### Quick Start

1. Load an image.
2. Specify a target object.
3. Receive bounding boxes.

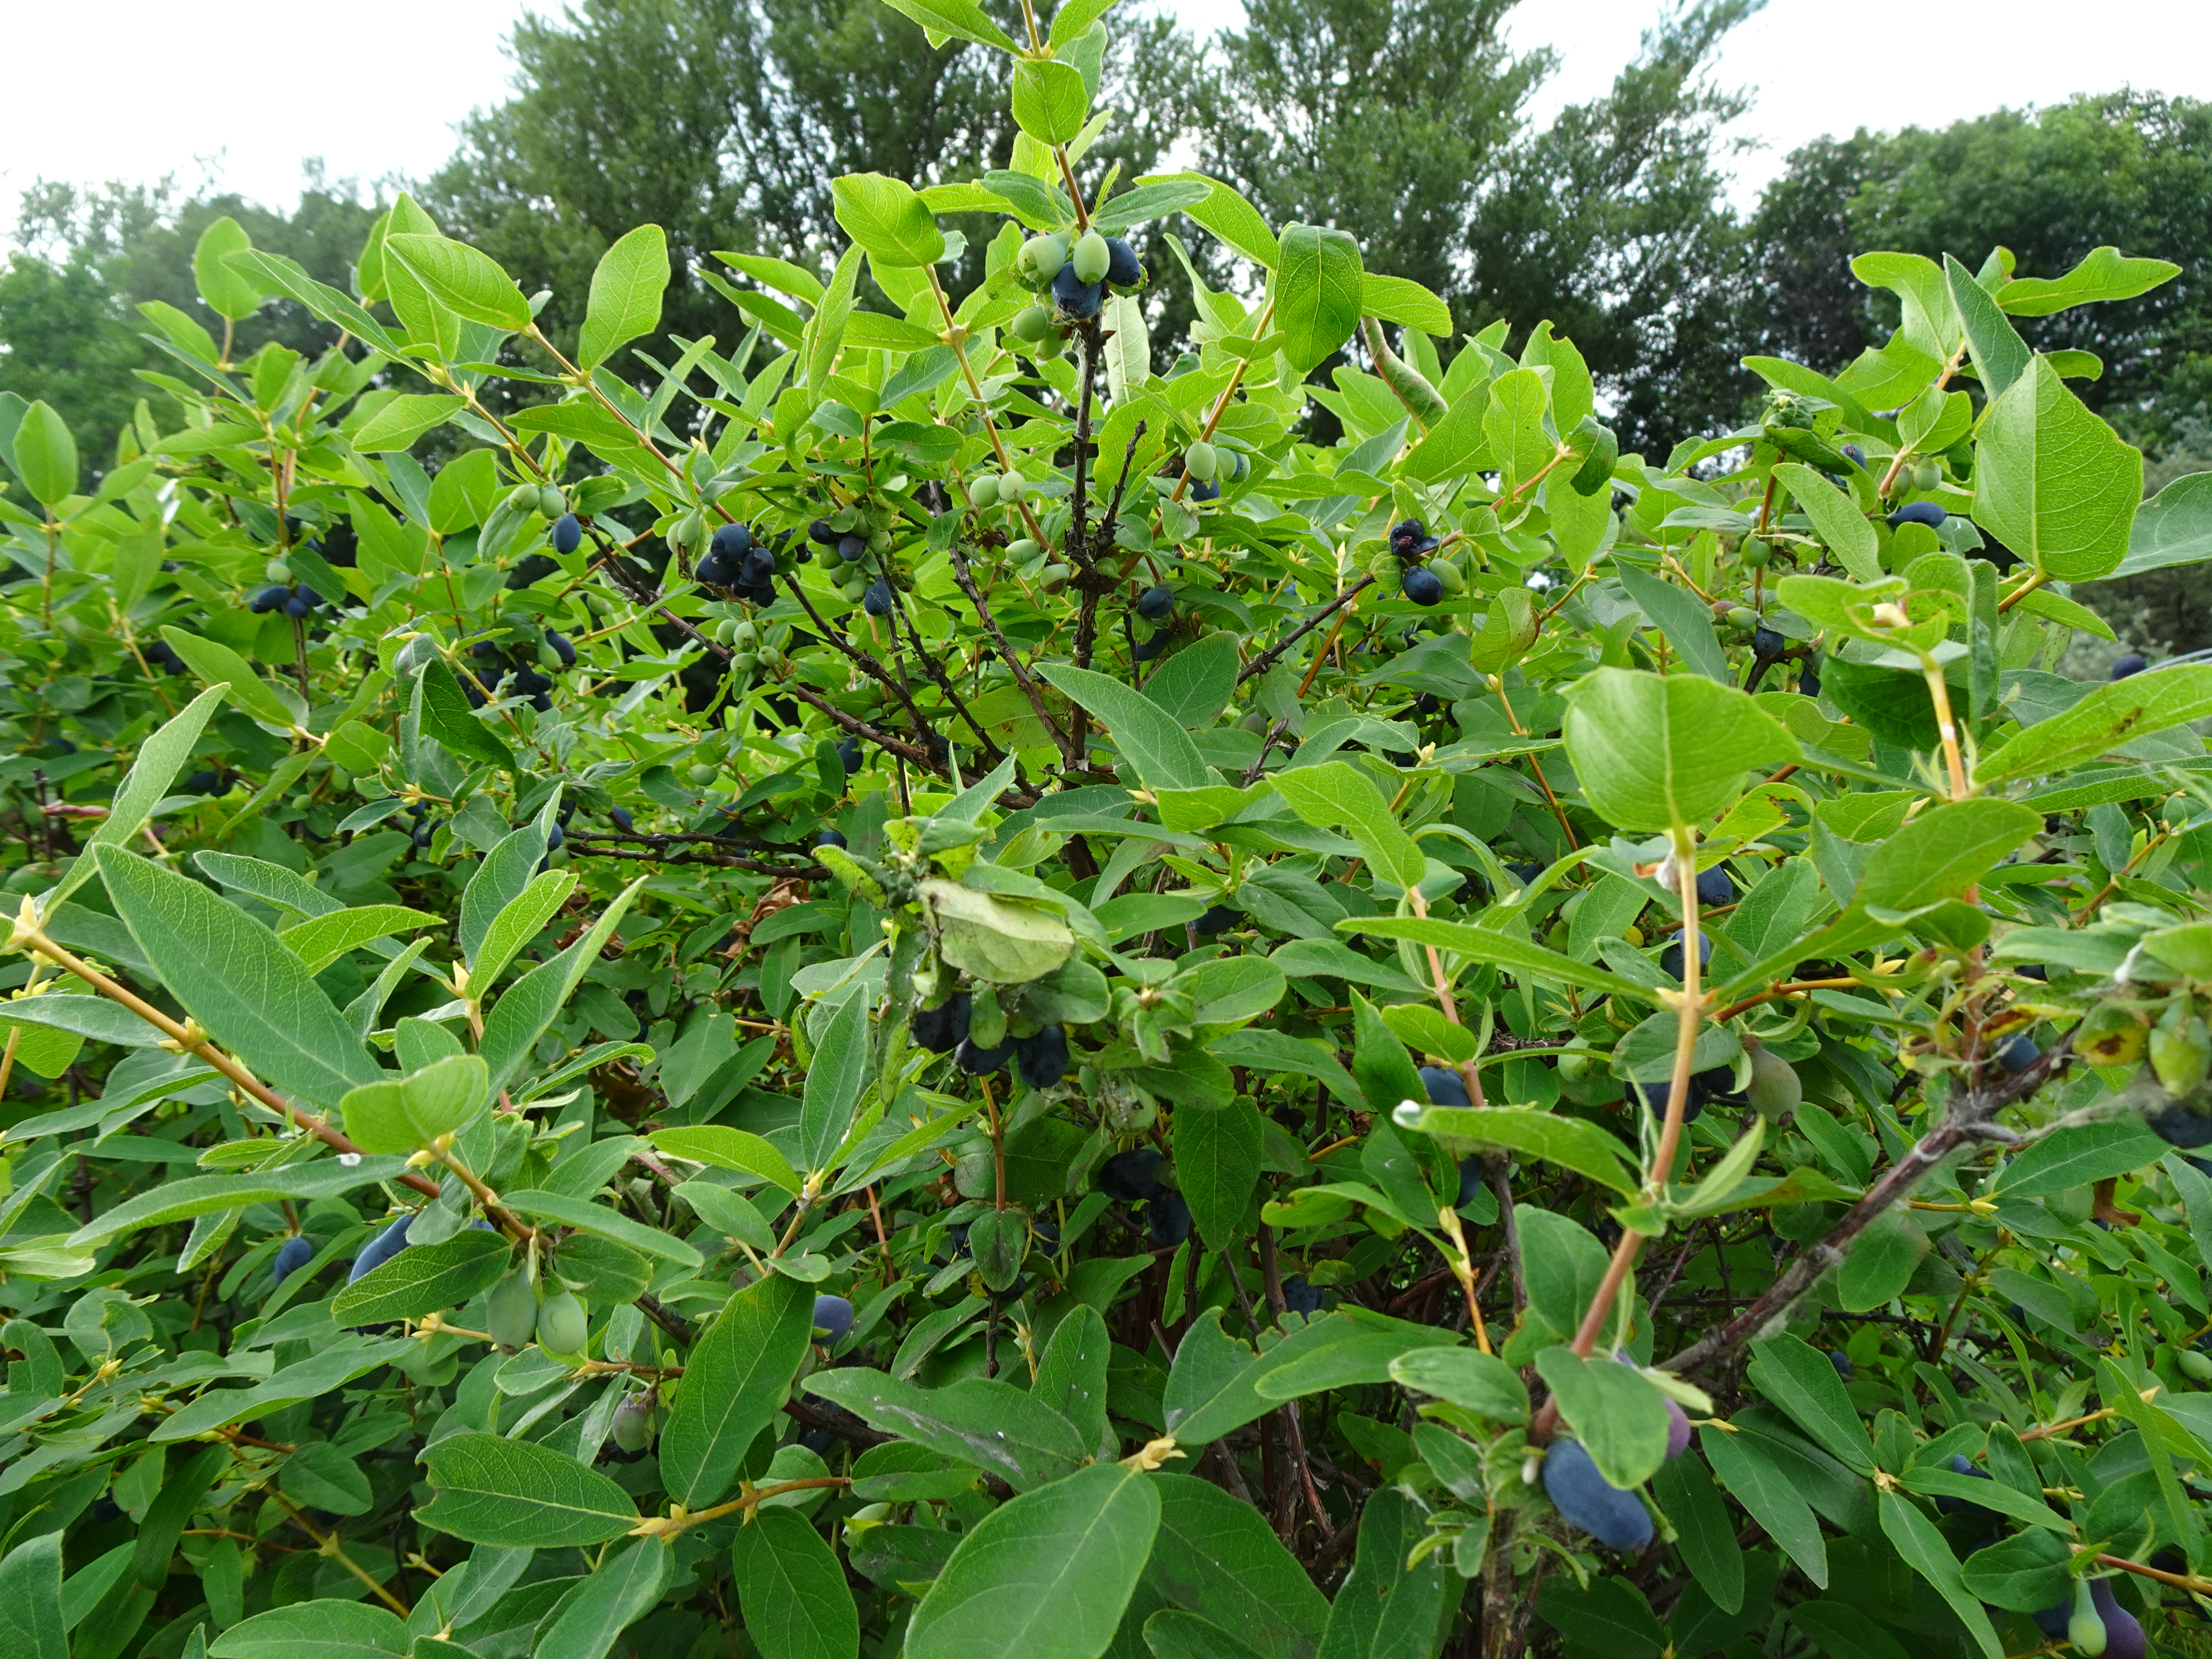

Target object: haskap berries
[191,772,219,790]
[2149,999,2210,1099]
[1070,1035,1106,1053]
[841,536,866,561]
[1327,646,1335,657]
[1077,1065,1103,1099]
[616,1446,648,1464]
[1241,710,1267,735]
[357,1324,391,1335]
[1075,1122,1084,1128]
[540,626,578,669]
[1190,478,1219,509]
[2176,1349,2212,1381]
[281,516,300,531]
[1722,1212,1739,1222]
[1013,299,1055,343]
[1357,643,1365,651]
[1006,538,1039,564]
[916,999,965,1050]
[1444,704,1461,730]
[2070,1579,2106,1657]
[1997,1032,2039,1071]
[1390,518,1423,553]
[1286,1108,1307,1129]
[1,798,20,813]
[94,676,116,705]
[2035,1606,2070,1638]
[1282,1274,1319,1318]
[488,1260,538,1351]
[537,855,549,874]
[736,572,772,587]
[595,814,613,829]
[1890,502,1947,526]
[1756,630,1783,658]
[1022,229,1070,284]
[742,549,774,581]
[350,1210,416,1286]
[1452,884,1468,905]
[1382,634,1407,651]
[1285,749,1295,758]
[1036,319,1073,361]
[509,481,541,512]
[677,509,699,544]
[549,822,562,854]
[95,1501,121,1522]
[752,585,776,608]
[1559,886,1587,924]
[413,818,449,847]
[1129,1210,1144,1224]
[562,1007,577,1025]
[1050,263,1092,317]
[291,794,313,811]
[711,801,745,840]
[1235,453,1242,475]
[153,823,168,840]
[1685,1077,1705,1125]
[2005,1157,2012,1164]
[302,828,332,842]
[1696,866,1731,908]
[714,563,742,586]
[472,628,494,657]
[1157,491,1164,497]
[48,739,75,752]
[535,482,570,520]
[250,587,288,613]
[832,578,843,589]
[999,470,1026,504]
[870,718,888,728]
[612,805,632,829]
[22,1082,39,1095]
[1149,1186,1189,1245]
[1418,692,1439,714]
[868,528,892,555]
[1560,1036,1593,1085]
[2073,1011,2153,1062]
[1983,1170,2003,1193]
[839,1503,896,1543]
[2087,1217,2113,1234]
[1506,862,1521,873]
[1887,465,1915,500]
[1661,928,1712,974]
[1798,661,1820,697]
[837,736,864,772]
[1272,1102,1289,1112]
[628,1014,650,1043]
[1710,601,1737,626]
[845,580,865,605]
[211,772,232,797]
[696,553,731,582]
[1419,1066,1470,1106]
[1738,534,1772,568]
[478,666,503,690]
[1771,1230,1796,1259]
[2022,1424,2061,1463]
[2114,655,2149,676]
[2142,1104,2211,1147]
[969,983,1011,1048]
[936,733,962,753]
[469,691,485,709]
[850,508,868,535]
[1390,752,1416,768]
[819,831,847,849]
[717,618,739,647]
[22,800,44,827]
[1651,1080,1694,1122]
[775,527,793,542]
[810,1295,856,1340]
[294,583,323,604]
[719,933,732,952]
[1549,924,1569,951]
[798,839,808,855]
[1032,1219,1066,1250]
[551,511,586,555]
[1347,933,1364,949]
[1376,593,1385,600]
[1136,625,1168,660]
[801,1400,844,1450]
[1724,607,1760,627]
[456,675,470,694]
[540,644,562,673]
[733,583,752,599]
[1282,581,1299,594]
[584,591,616,615]
[792,542,813,563]
[1744,1038,1803,1125]
[985,1273,1031,1299]
[611,1392,655,1453]
[1431,559,1463,594]
[461,1215,498,1236]
[821,543,842,567]
[477,853,486,862]
[930,863,941,874]
[686,764,717,785]
[2005,1303,2024,1336]
[1701,1064,1748,1102]
[758,646,779,664]
[831,562,852,585]
[829,503,861,530]
[1520,863,1544,883]
[268,562,294,584]
[1471,547,1489,565]
[630,989,647,1004]
[1405,633,1419,649]
[1099,1149,1164,1196]
[733,622,756,651]
[2190,1158,2212,1174]
[729,653,757,673]
[319,1512,340,1526]
[1332,585,1336,591]
[1913,457,1939,491]
[272,1234,315,1282]
[2098,1580,2146,1656]
[807,517,840,546]
[959,1022,1011,1076]
[1040,563,1068,597]
[1219,446,1235,480]
[521,674,552,693]
[1458,1150,1484,1209]
[408,799,430,813]
[865,580,892,617]
[1625,1082,1651,1104]
[1023,1020,1070,1092]
[1835,446,1866,486]
[146,641,174,663]
[969,473,998,506]
[710,524,750,560]
[685,1001,698,1012]
[512,661,535,689]
[666,515,688,553]
[1183,442,1217,478]
[530,693,553,711]
[1072,228,1110,285]
[549,849,569,867]
[578,807,592,818]
[2025,964,2045,980]
[1189,898,1244,934]
[538,1294,586,1355]
[651,1435,660,1459]
[301,537,323,553]
[1107,1086,1156,1133]
[1667,1395,1689,1462]
[1933,1495,1957,1505]
[731,847,750,858]
[1512,1173,1519,1186]
[1831,1352,1852,1378]
[1404,566,1440,605]
[1103,232,1143,290]
[329,764,349,791]
[1588,1220,1617,1248]
[2046,815,2059,834]
[1035,869,1041,878]
[288,601,308,618]
[1545,1442,1649,1553]
[164,656,185,676]
[1135,589,1174,615]
[948,1225,972,1257]
[558,789,576,826]
[1955,1454,1972,1476]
